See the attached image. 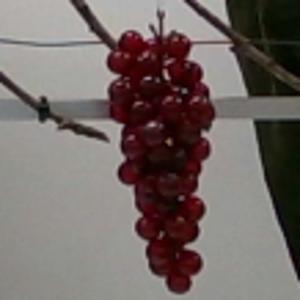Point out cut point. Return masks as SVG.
Segmentation results:
<instances>
[{
  "instance_id": "6a23745f",
  "label": "cut point",
  "mask_w": 300,
  "mask_h": 300,
  "mask_svg": "<svg viewBox=\"0 0 300 300\" xmlns=\"http://www.w3.org/2000/svg\"><path fill=\"white\" fill-rule=\"evenodd\" d=\"M156 17L159 21V34L156 35V41L161 42L165 39L164 21L166 18L165 0H157L156 2Z\"/></svg>"
}]
</instances>
